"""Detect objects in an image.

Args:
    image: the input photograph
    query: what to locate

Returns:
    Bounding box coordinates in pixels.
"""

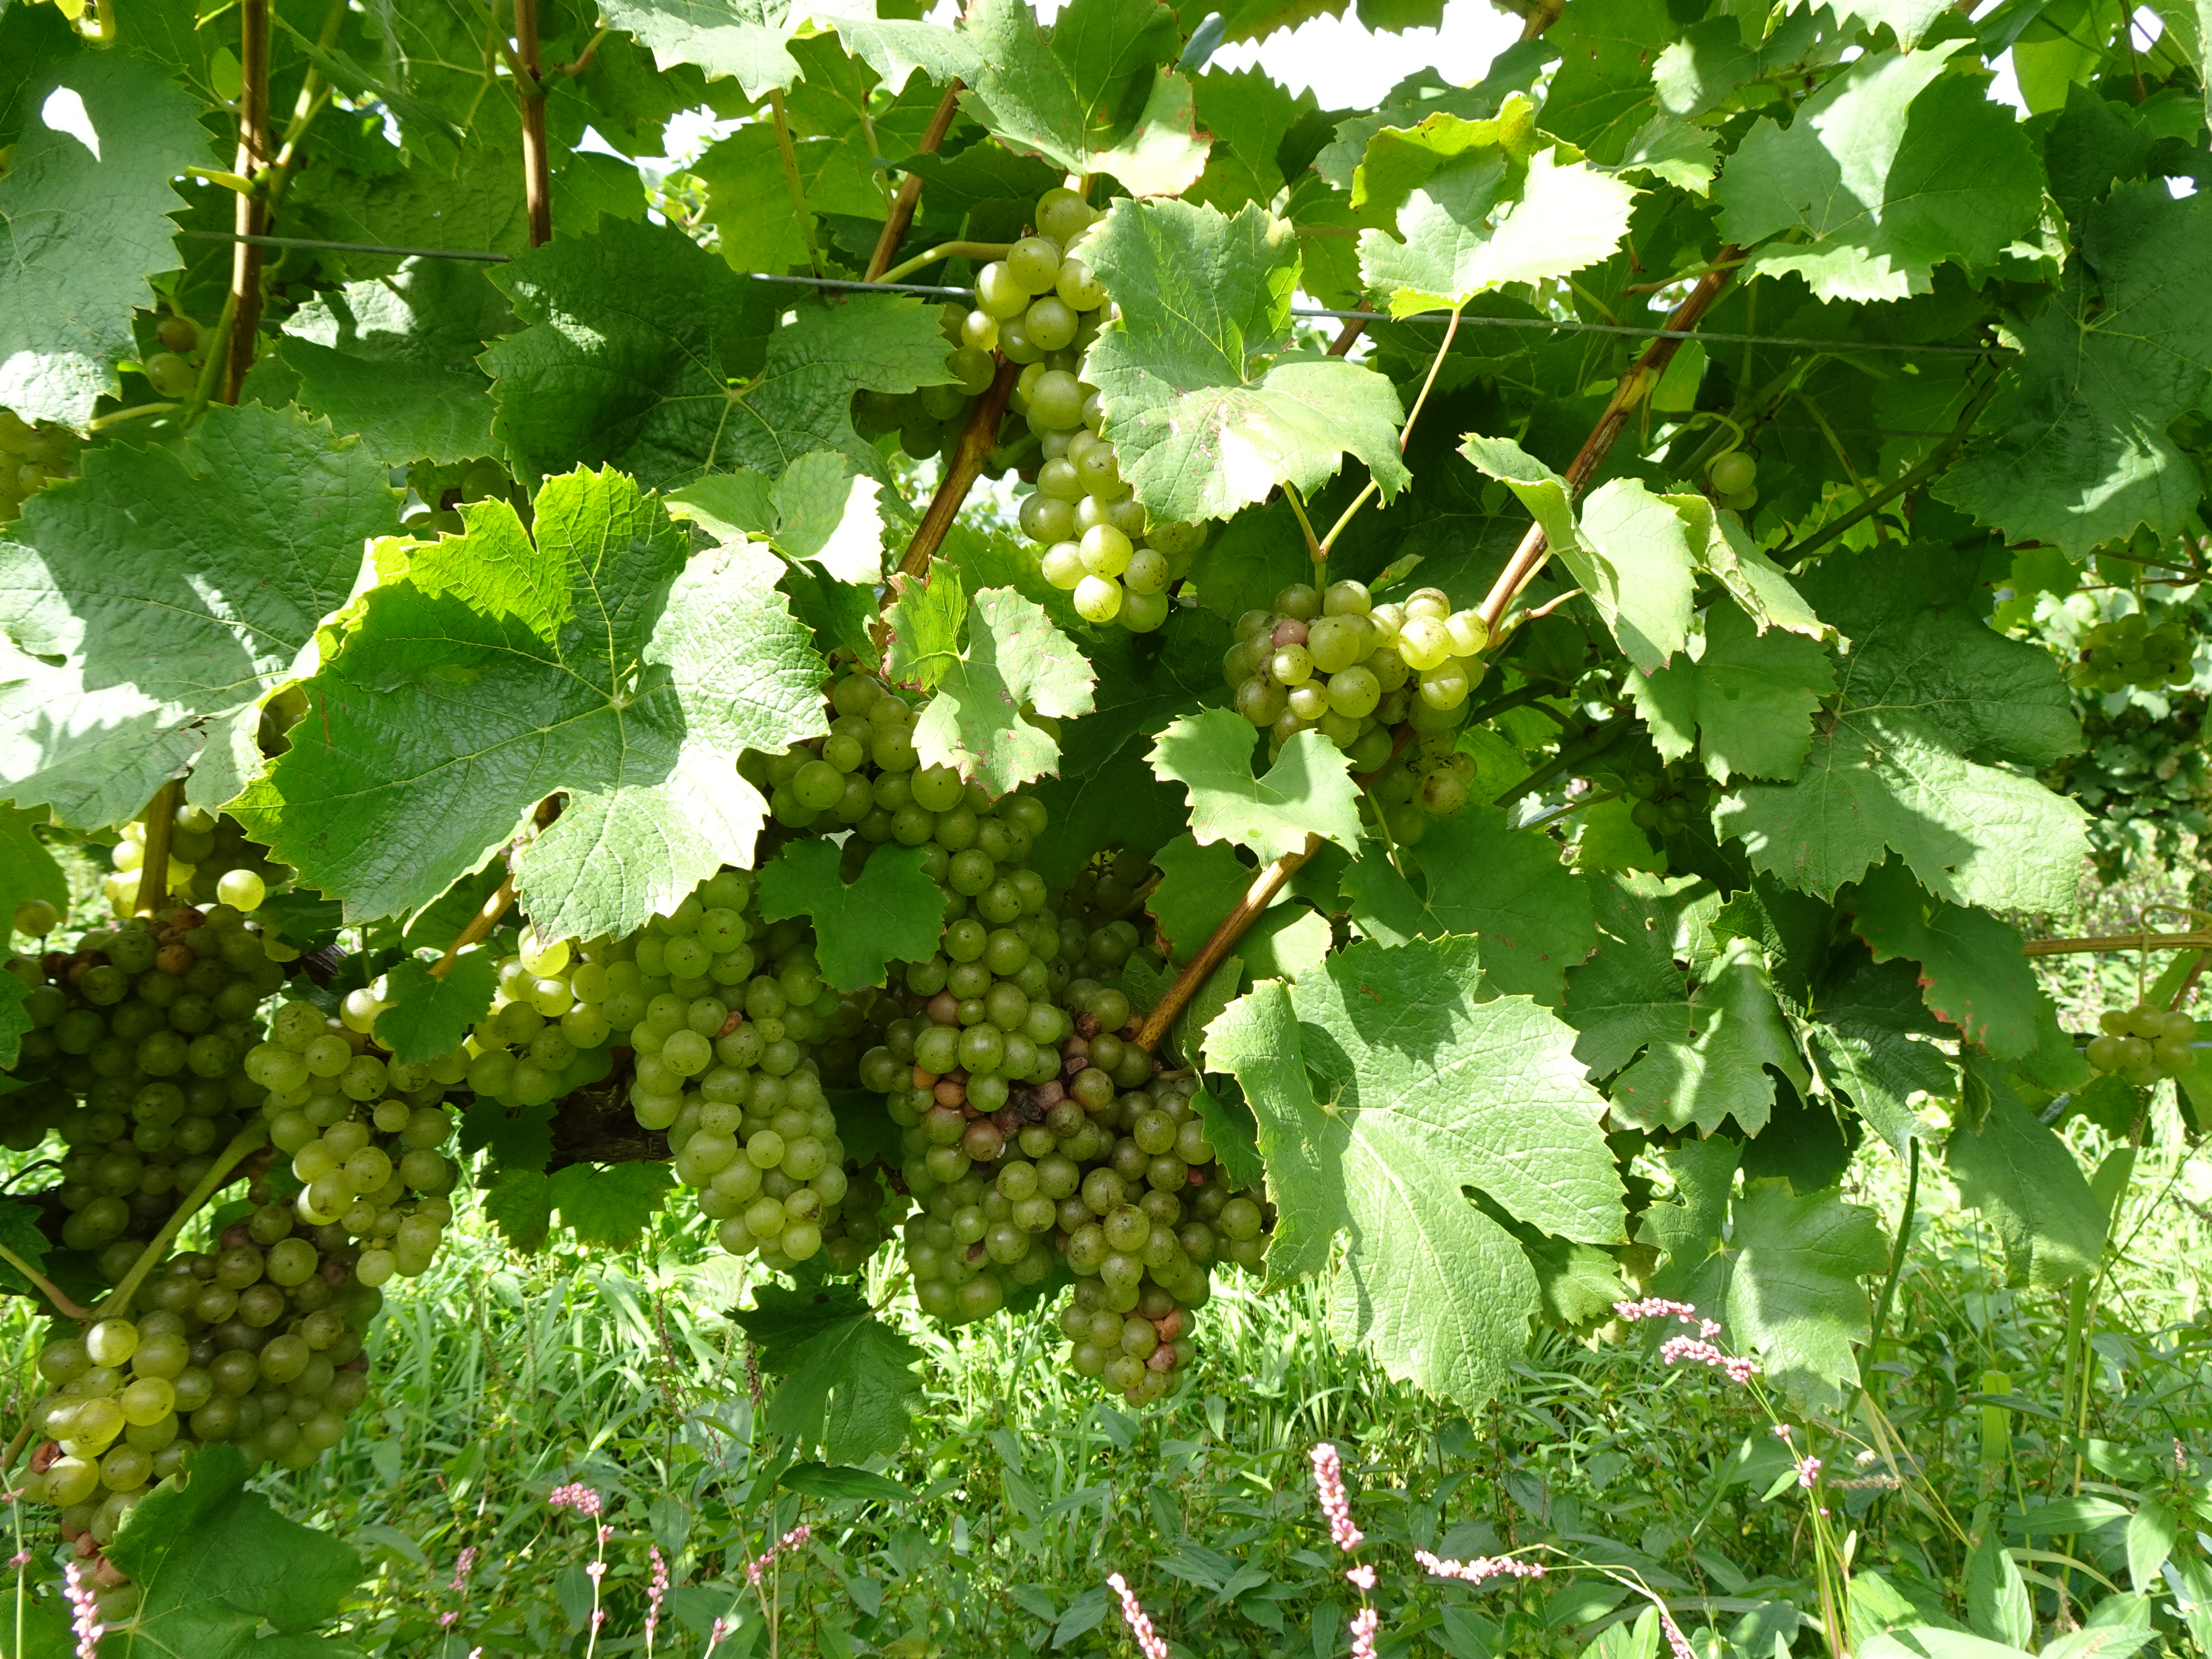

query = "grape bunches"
[54,904,285,1286]
[733,904,827,975]
[169,682,314,902]
[807,960,925,1274]
[1628,758,1696,837]
[961,188,1208,635]
[216,869,303,959]
[629,948,841,1269]
[1,898,76,1151]
[753,671,1062,1110]
[1705,452,1760,513]
[1044,847,1151,991]
[851,304,1044,482]
[7,1299,191,1545]
[463,923,616,1106]
[1055,1075,1282,1408]
[100,822,196,920]
[1222,581,1411,772]
[429,456,512,542]
[602,865,754,1130]
[858,976,1118,1323]
[245,974,472,1288]
[133,1177,384,1478]
[1365,587,1489,845]
[144,314,221,397]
